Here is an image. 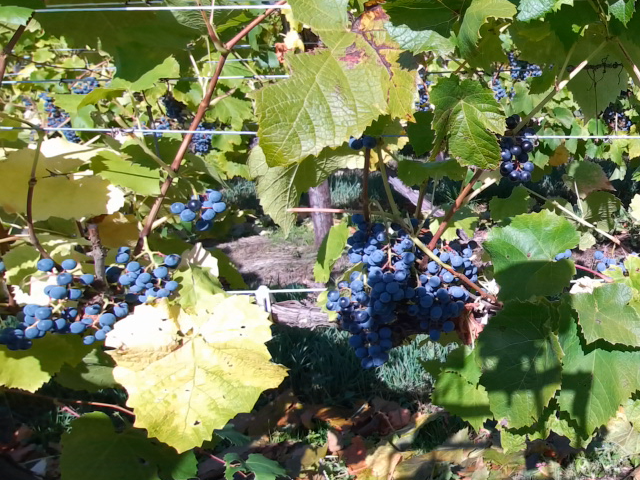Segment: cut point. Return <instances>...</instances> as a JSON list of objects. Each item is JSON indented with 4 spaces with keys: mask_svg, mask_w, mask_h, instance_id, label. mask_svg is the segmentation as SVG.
<instances>
[{
    "mask_svg": "<svg viewBox=\"0 0 640 480\" xmlns=\"http://www.w3.org/2000/svg\"><path fill=\"white\" fill-rule=\"evenodd\" d=\"M370 203L377 208V211L379 213L383 226L385 228H388L390 226V222H389L386 210L384 208V205L376 197H371Z\"/></svg>",
    "mask_w": 640,
    "mask_h": 480,
    "instance_id": "1",
    "label": "cut point"
},
{
    "mask_svg": "<svg viewBox=\"0 0 640 480\" xmlns=\"http://www.w3.org/2000/svg\"><path fill=\"white\" fill-rule=\"evenodd\" d=\"M143 242H144V247H145L146 252L150 253L151 252V247H150L149 240H148L147 236L144 237V241Z\"/></svg>",
    "mask_w": 640,
    "mask_h": 480,
    "instance_id": "2",
    "label": "cut point"
}]
</instances>
